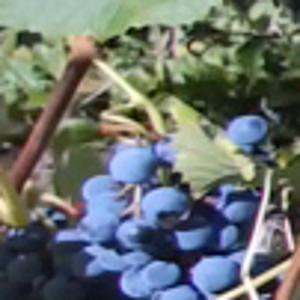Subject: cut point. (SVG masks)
Here are the masks:
<instances>
[{
  "instance_id": "6a23745f",
  "label": "cut point",
  "mask_w": 300,
  "mask_h": 300,
  "mask_svg": "<svg viewBox=\"0 0 300 300\" xmlns=\"http://www.w3.org/2000/svg\"><path fill=\"white\" fill-rule=\"evenodd\" d=\"M92 61L101 67V70L106 73V76L115 81L121 88V90L131 97L141 108L148 110L153 108L154 104L149 102L144 96H142L134 86L127 83V81L116 73V71L108 64L103 63L97 57H93Z\"/></svg>"
}]
</instances>
